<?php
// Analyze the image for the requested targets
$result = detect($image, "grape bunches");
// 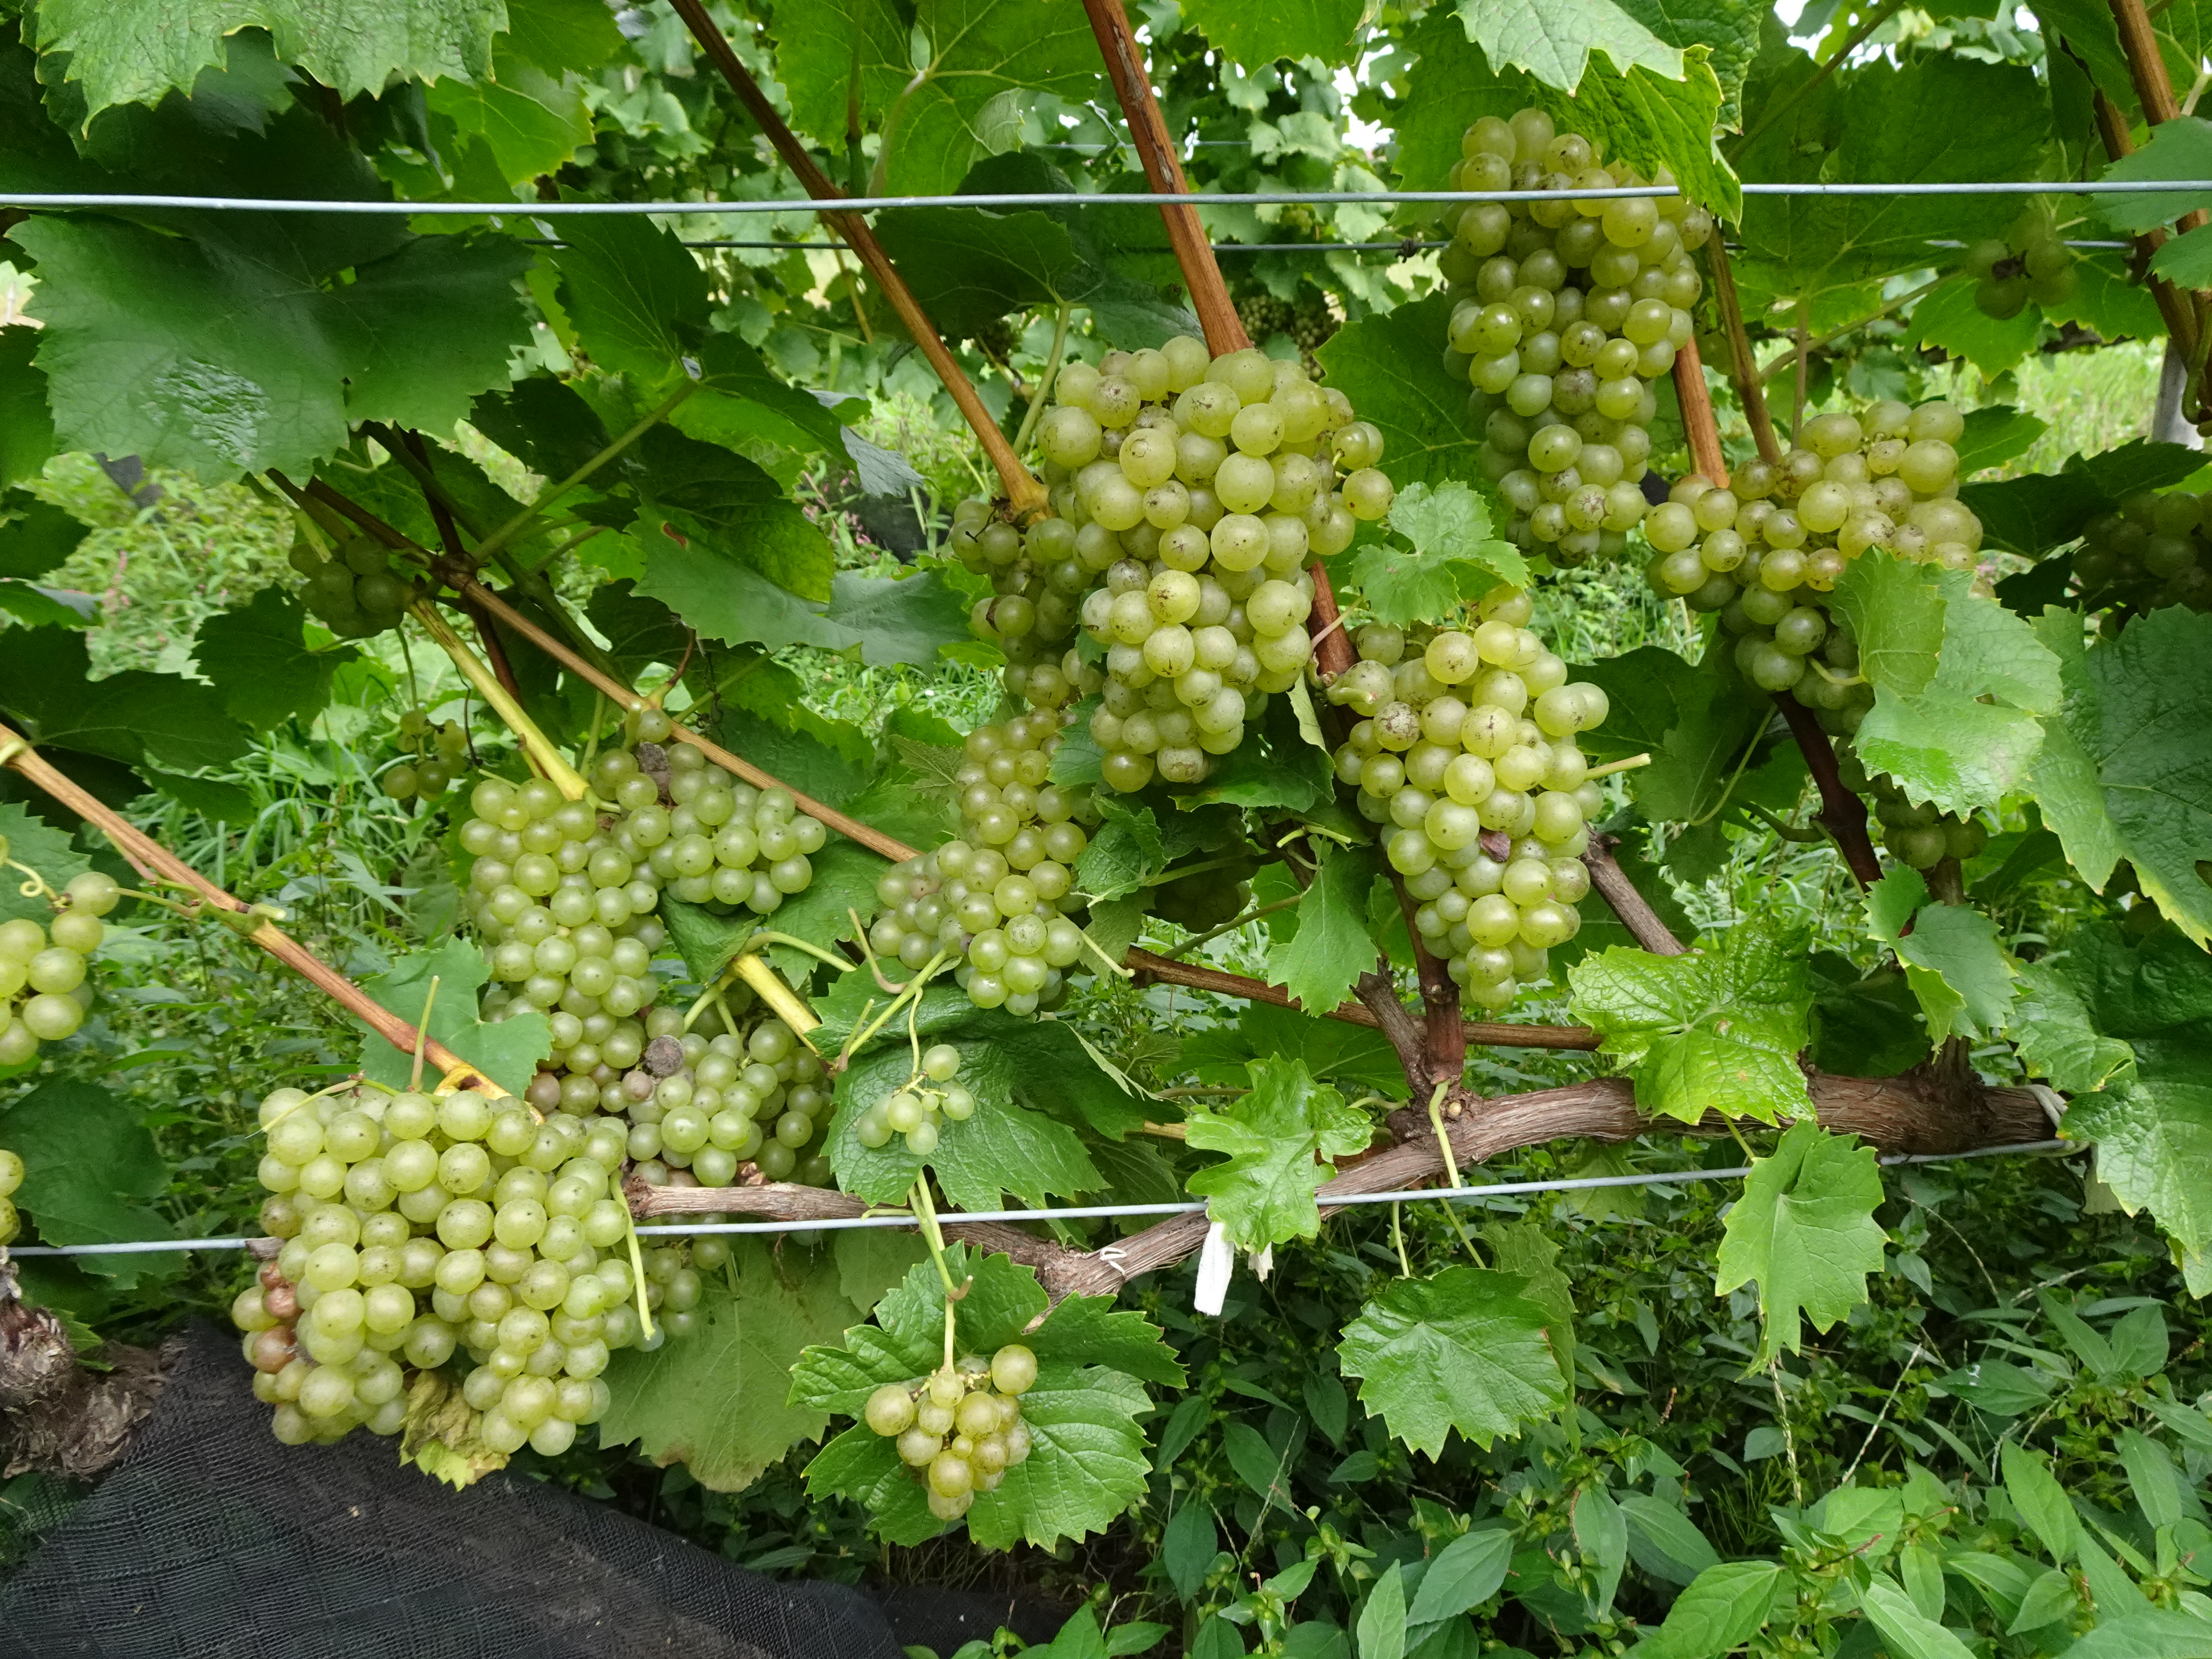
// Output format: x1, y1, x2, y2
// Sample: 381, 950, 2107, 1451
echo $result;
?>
0, 1150, 25, 1245
872, 1464, 1036, 1524
0, 871, 120, 1067
724, 1048, 840, 1248
1437, 106, 1713, 568
869, 839, 976, 971
1332, 583, 1610, 1012
593, 707, 827, 917
1644, 456, 1777, 610
938, 706, 1103, 1016
1723, 399, 1982, 738
951, 499, 1097, 710
458, 777, 669, 1116
1837, 738, 1987, 871
865, 1344, 1037, 1464
628, 1004, 798, 1187
857, 1045, 975, 1155
382, 710, 467, 803
430, 1091, 640, 1455
1965, 207, 2077, 321
1036, 335, 1396, 792
232, 1083, 455, 1446
683, 976, 759, 1041
611, 1158, 730, 1351
2072, 487, 2212, 592
287, 532, 416, 638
